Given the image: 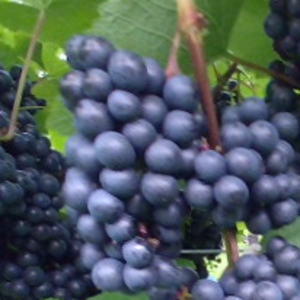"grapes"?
<instances>
[{
	"label": "grapes",
	"instance_id": "1",
	"mask_svg": "<svg viewBox=\"0 0 300 300\" xmlns=\"http://www.w3.org/2000/svg\"><path fill=\"white\" fill-rule=\"evenodd\" d=\"M65 54L73 68L59 95L78 131L64 154L67 216L87 242L80 258L101 292L133 295L154 285L193 300H300V251L281 236L265 252L239 256L218 282L199 280L173 261L191 205L210 209L220 229L245 223L263 235L300 216V183L288 141L299 133L291 112L270 116L248 97L220 118L223 152L211 148L199 84L165 79L161 65L99 34L78 33Z\"/></svg>",
	"mask_w": 300,
	"mask_h": 300
}]
</instances>
